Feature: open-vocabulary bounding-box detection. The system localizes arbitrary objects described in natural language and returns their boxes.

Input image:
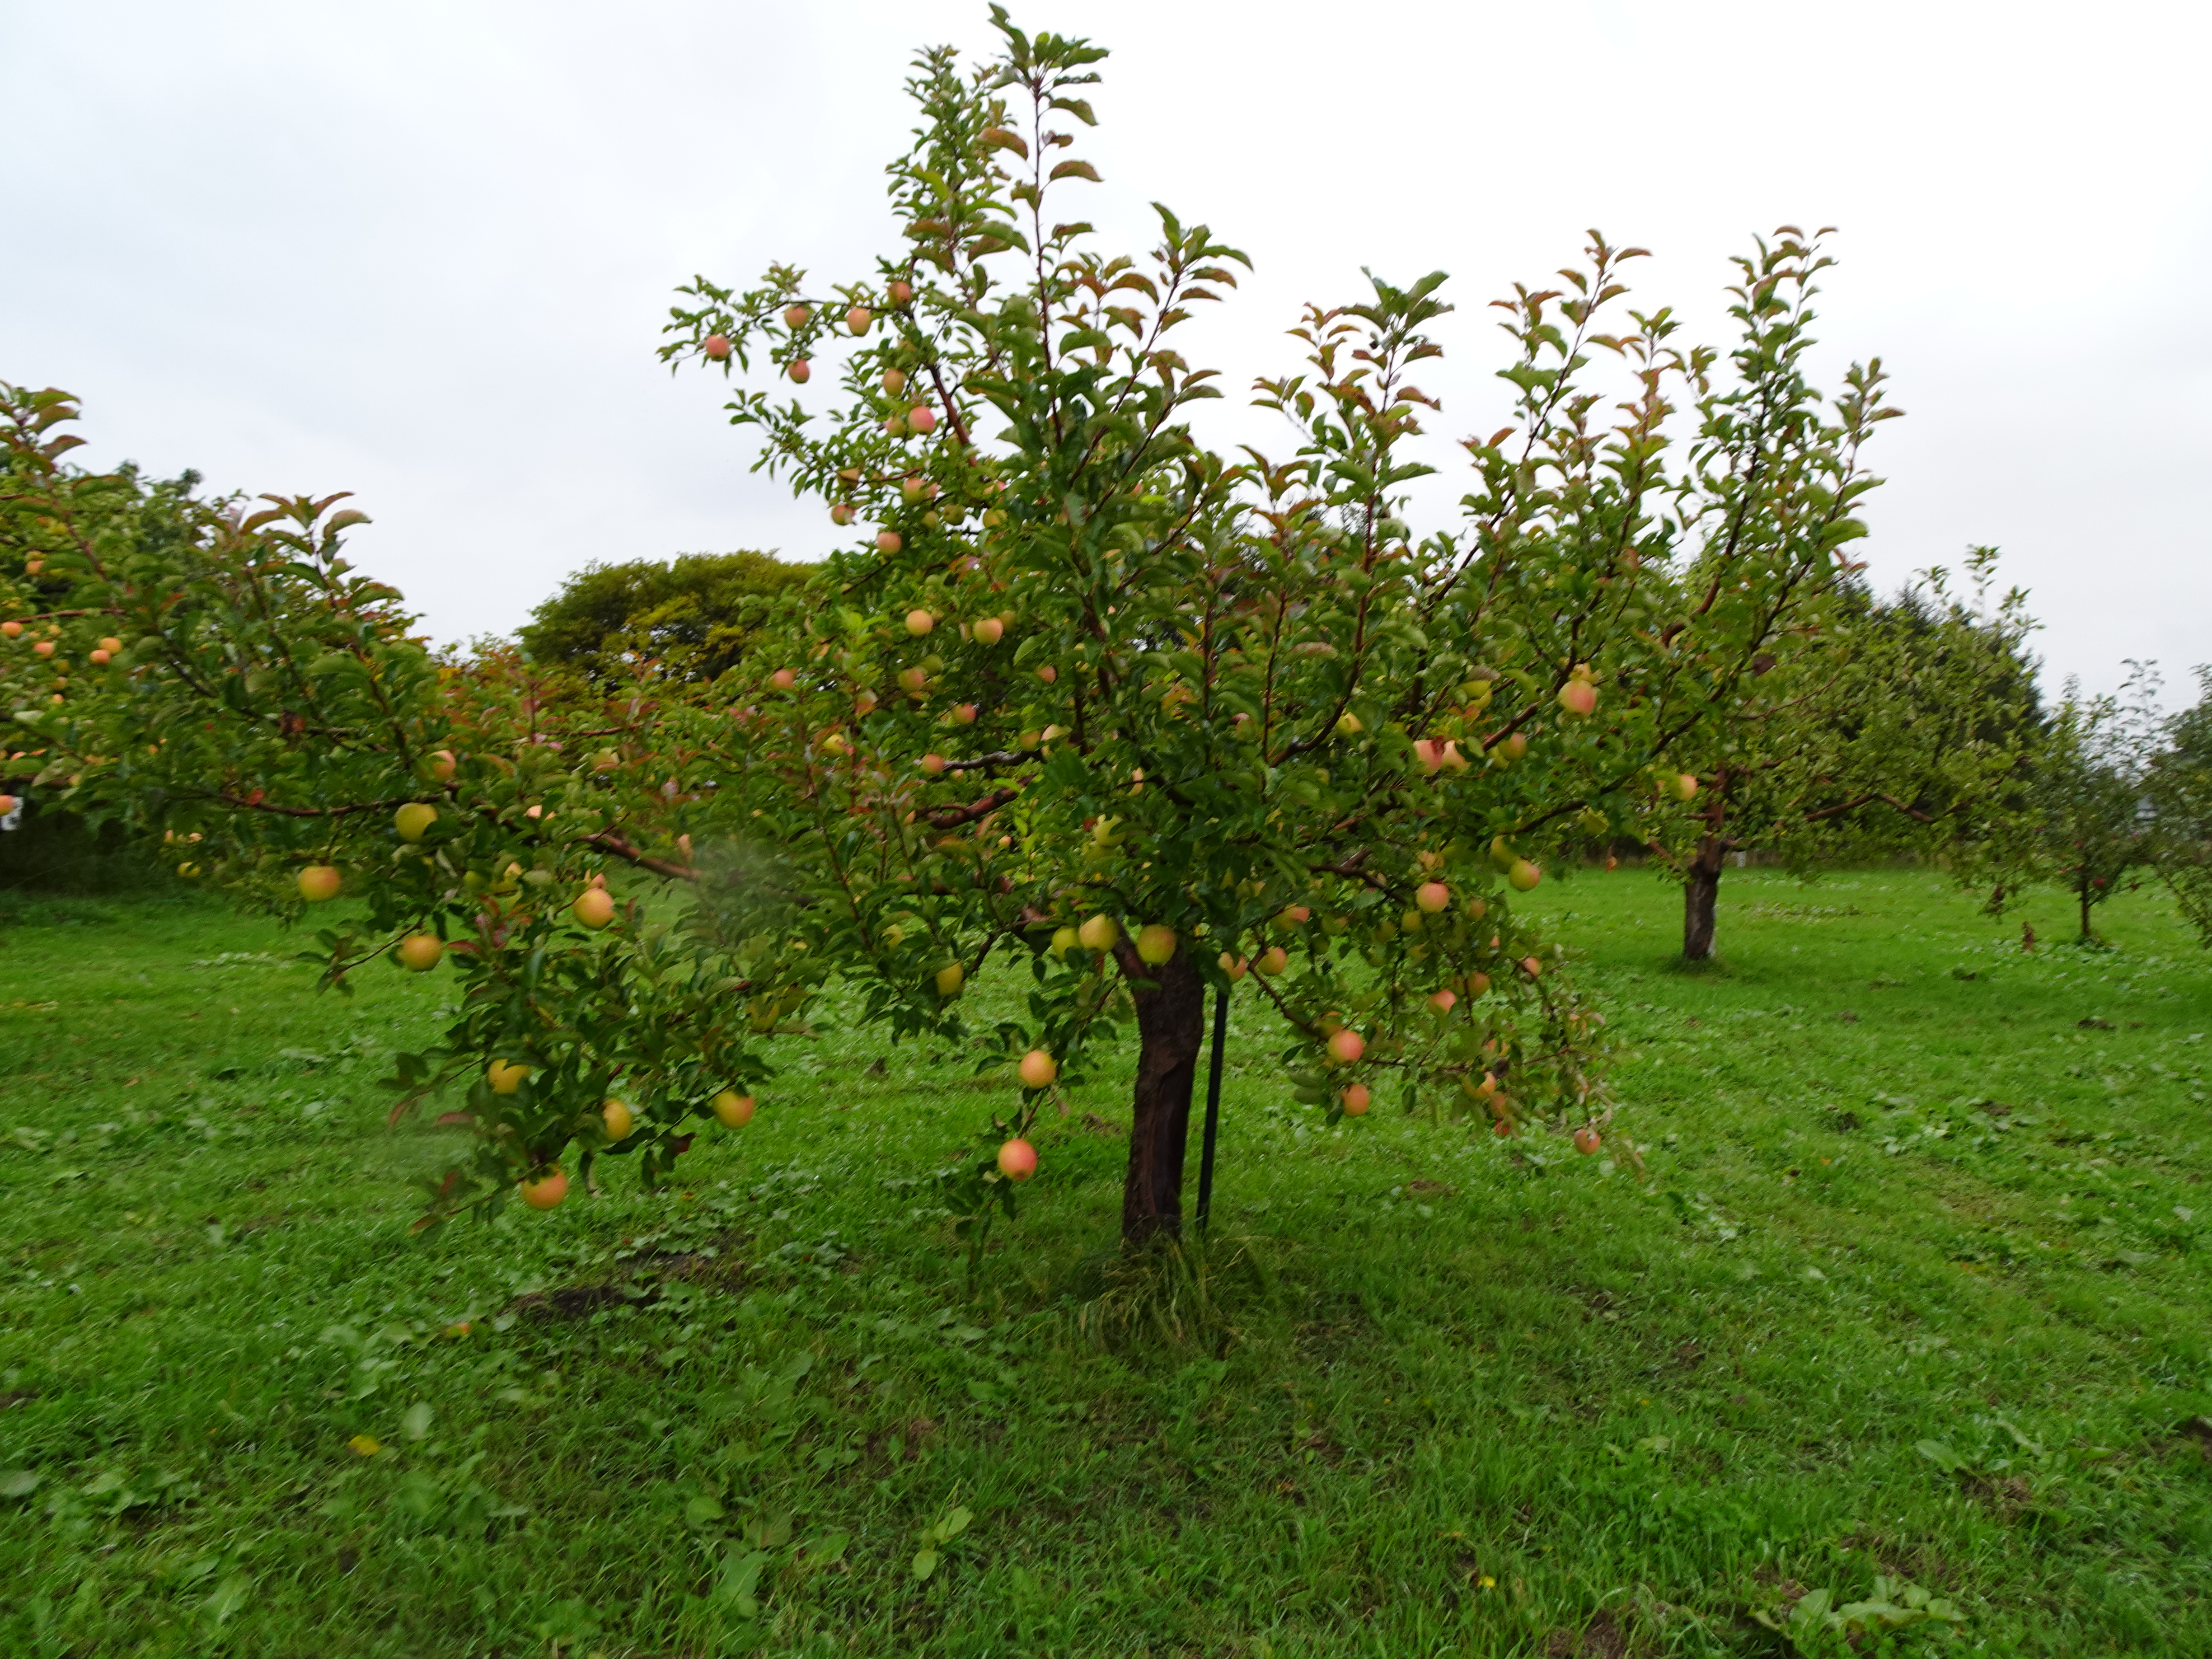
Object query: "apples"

[1407,940,1430,960]
[1459,665,1493,699]
[603,1097,633,1142]
[832,505,855,525]
[885,416,903,437]
[1322,911,1348,936]
[897,338,918,352]
[1079,912,1118,955]
[1442,739,1470,771]
[897,667,925,693]
[1111,761,1144,796]
[905,609,934,636]
[921,510,940,528]
[1327,1030,1364,1067]
[1137,923,1176,967]
[678,833,693,863]
[1428,989,1456,1015]
[920,753,943,774]
[1489,935,1500,947]
[942,505,965,525]
[463,870,487,890]
[883,924,904,947]
[521,1166,567,1211]
[952,703,977,725]
[1335,686,1366,733]
[997,1139,1037,1180]
[1377,921,1397,942]
[1463,1071,1496,1099]
[584,868,605,888]
[487,1058,531,1095]
[706,333,729,360]
[1311,933,1329,955]
[771,669,794,691]
[591,747,620,770]
[882,368,908,396]
[1040,723,1075,762]
[936,962,963,994]
[876,531,901,554]
[1218,952,1245,985]
[1019,727,1042,751]
[868,470,886,489]
[1401,909,1425,933]
[1366,944,1387,967]
[1037,664,1055,684]
[1416,880,1450,914]
[921,652,944,676]
[1418,848,1444,873]
[907,406,936,434]
[1051,925,1082,961]
[997,835,1011,847]
[1497,731,1528,762]
[1094,813,1127,849]
[504,862,522,877]
[982,480,1007,504]
[999,610,1020,634]
[847,307,871,336]
[1494,1117,1510,1136]
[902,477,928,505]
[925,482,938,499]
[1018,1049,1056,1089]
[780,986,802,1015]
[840,582,853,598]
[1412,740,1442,775]
[973,616,1003,647]
[808,644,839,663]
[1467,972,1491,997]
[888,281,911,308]
[788,360,811,385]
[1492,1093,1506,1117]
[1358,870,1387,887]
[1342,1082,1371,1118]
[1557,678,1596,714]
[426,749,456,777]
[1569,1014,1586,1036]
[714,1089,755,1130]
[837,465,861,491]
[1459,896,1487,921]
[395,802,439,844]
[821,733,845,755]
[1257,946,1287,976]
[1510,859,1541,891]
[1574,1129,1600,1155]
[750,989,780,1032]
[962,369,980,395]
[1486,1038,1509,1059]
[1322,1010,1343,1038]
[1518,957,1542,977]
[1491,834,1522,874]
[1284,903,1310,923]
[1486,746,1510,772]
[846,872,869,903]
[1569,661,1591,681]
[1667,774,1699,802]
[297,865,340,903]
[982,506,1007,528]
[403,932,442,972]
[574,887,617,931]
[949,769,964,780]
[524,804,557,820]
[904,810,916,825]
[784,306,807,330]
